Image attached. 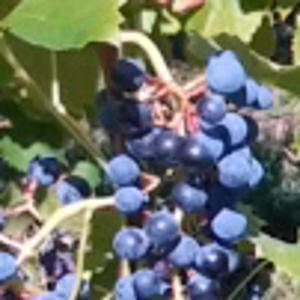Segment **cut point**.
Instances as JSON below:
<instances>
[{
	"instance_id": "cut-point-1",
	"label": "cut point",
	"mask_w": 300,
	"mask_h": 300,
	"mask_svg": "<svg viewBox=\"0 0 300 300\" xmlns=\"http://www.w3.org/2000/svg\"><path fill=\"white\" fill-rule=\"evenodd\" d=\"M118 39L124 44L142 46L146 49L152 60V66L156 75L161 79L171 78L172 68L162 52L160 45L152 36L145 32L122 30L118 34Z\"/></svg>"
}]
</instances>
